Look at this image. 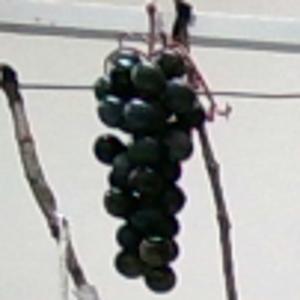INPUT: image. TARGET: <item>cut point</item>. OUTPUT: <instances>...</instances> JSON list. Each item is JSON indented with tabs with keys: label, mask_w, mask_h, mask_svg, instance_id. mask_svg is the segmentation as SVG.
Returning a JSON list of instances; mask_svg holds the SVG:
<instances>
[{
	"label": "cut point",
	"mask_w": 300,
	"mask_h": 300,
	"mask_svg": "<svg viewBox=\"0 0 300 300\" xmlns=\"http://www.w3.org/2000/svg\"><path fill=\"white\" fill-rule=\"evenodd\" d=\"M159 8L157 0H145L144 12L148 19V61L151 62L155 54V26Z\"/></svg>",
	"instance_id": "cut-point-1"
}]
</instances>
